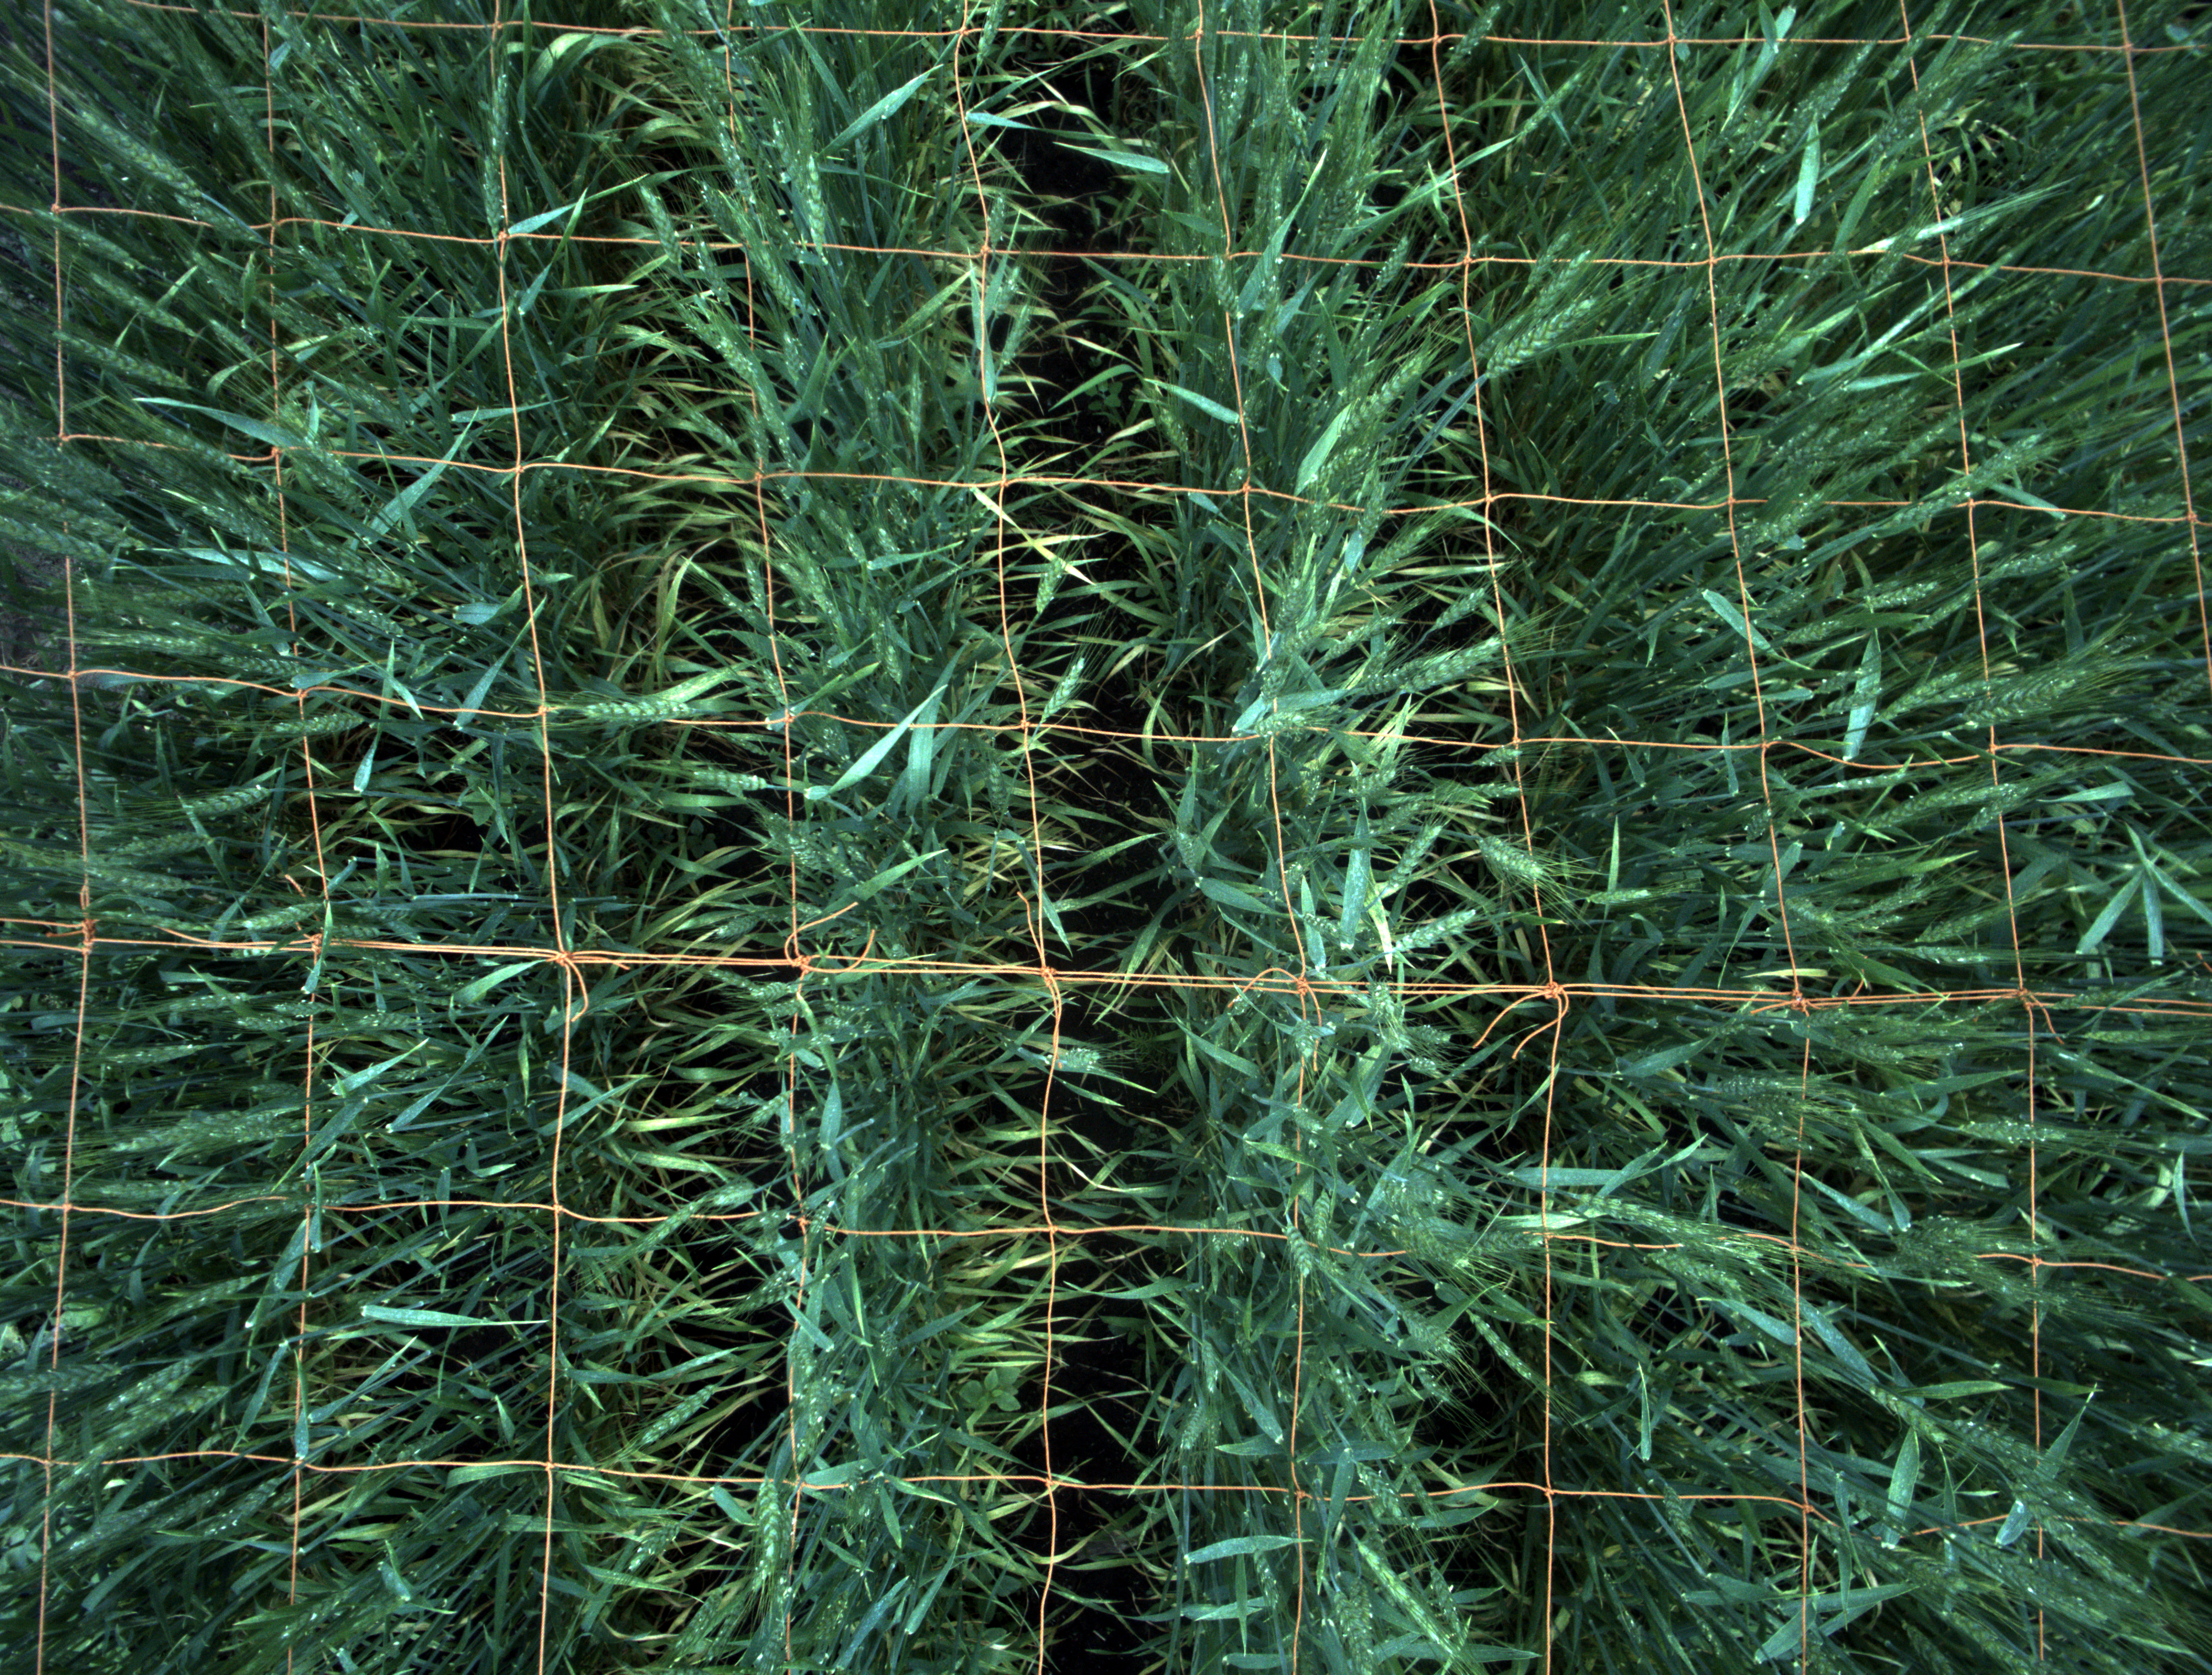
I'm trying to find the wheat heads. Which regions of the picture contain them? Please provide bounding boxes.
[1745,293,1788,338]
[1534,249,1591,321]
[1928,434,2040,498]
[709,1591,744,1650]
[1399,1310,1456,1360]
[716,124,752,200]
[1199,1341,1219,1392]
[1243,394,1267,423]
[231,944,276,961]
[690,770,767,792]
[1620,1605,1643,1650]
[1784,619,1845,646]
[761,664,787,706]
[303,435,351,482]
[1200,0,1219,71]
[771,118,796,185]
[1875,157,1896,189]
[1966,667,2082,730]
[761,391,788,434]
[1930,31,2023,90]
[1664,1485,1692,1536]
[763,1266,791,1292]
[1570,1191,1711,1242]
[1270,76,1289,119]
[820,724,842,753]
[1354,643,1395,683]
[767,812,796,834]
[1380,25,1394,67]
[151,415,255,478]
[1470,1312,1531,1382]
[1374,235,1408,292]
[298,240,348,295]
[235,1014,307,1033]
[1929,676,2011,702]
[1809,241,1849,280]
[408,995,453,1009]
[172,1272,267,1318]
[1814,667,1868,693]
[806,567,833,610]
[228,1105,304,1130]
[1284,859,1303,890]
[277,1477,320,1505]
[1215,343,1232,386]
[1919,914,1984,942]
[1773,424,1817,462]
[344,319,379,345]
[1306,1360,1337,1386]
[861,1480,874,1511]
[1902,1621,1950,1674]
[2083,1029,2171,1046]
[1903,875,1924,888]
[99,1043,198,1072]
[867,338,888,390]
[1802,1009,1854,1027]
[1310,1189,1333,1246]
[1489,297,1596,376]
[1433,588,1483,629]
[744,1093,790,1125]
[272,1001,329,1018]
[316,1257,359,1282]
[107,1384,229,1439]
[1318,1256,1345,1280]
[344,78,374,114]
[202,8,249,58]
[1749,1113,1813,1153]
[1856,392,1895,422]
[1326,975,1370,1007]
[1364,1516,1388,1563]
[1391,1229,1441,1258]
[1166,2,1190,85]
[193,252,241,312]
[1778,15,1824,64]
[1806,1641,1837,1673]
[782,333,803,386]
[1968,786,2032,833]
[1304,762,1321,807]
[138,448,216,502]
[824,852,856,879]
[690,411,742,455]
[684,69,724,112]
[1371,1394,1403,1452]
[1867,1386,1944,1444]
[1821,40,1873,116]
[752,1483,779,1581]
[227,1182,305,1205]
[823,1015,849,1030]
[986,761,1006,818]
[67,0,127,38]
[745,569,770,613]
[1314,445,1361,492]
[236,1470,285,1522]
[1953,1118,2068,1145]
[1952,1418,2043,1463]
[310,537,419,599]
[1865,915,1905,930]
[1344,207,1361,229]
[1212,1222,1226,1249]
[2151,667,2210,703]
[1289,1108,1325,1133]
[1969,1538,2090,1621]
[1526,69,1582,125]
[1693,298,1739,343]
[722,29,747,62]
[211,319,270,374]
[1405,1182,1451,1207]
[927,505,938,522]
[301,463,367,513]
[2009,1484,2142,1597]
[802,1034,835,1045]
[1402,1463,1436,1511]
[1879,1544,1965,1588]
[714,912,757,938]
[702,185,739,239]
[108,632,216,658]
[1296,1027,1317,1058]
[1205,1424,1219,1447]
[753,981,792,1002]
[93,1178,178,1201]
[1231,986,1255,1015]
[1475,780,1519,800]
[1365,653,1436,696]
[471,1079,506,1090]
[190,783,271,816]
[988,193,1008,243]
[1816,455,1895,500]
[749,411,768,466]
[393,1066,433,1083]
[709,967,753,987]
[1873,440,1891,448]
[843,530,869,563]
[1947,1007,1989,1026]
[395,1427,444,1465]
[0,485,117,544]
[1911,593,1971,635]
[1472,324,1508,364]
[1358,1540,1427,1623]
[93,867,194,900]
[339,1598,400,1641]
[1281,620,1328,650]
[1055,1047,1102,1067]
[252,1082,304,1103]
[484,155,506,234]
[75,102,200,196]
[1824,424,1887,459]
[1255,170,1268,225]
[260,1,311,60]
[0,516,108,567]
[1316,187,1353,236]
[1617,387,1636,435]
[1877,400,1915,425]
[879,531,901,554]
[1872,1013,1952,1037]
[1383,151,1430,187]
[764,1025,793,1045]
[627,1521,681,1572]
[774,226,803,261]
[721,591,756,622]
[1866,223,1919,291]
[1332,1364,1358,1405]
[751,1228,779,1250]
[1746,493,1821,546]
[580,699,696,726]
[1641,1250,1741,1291]
[865,386,880,435]
[1476,748,1526,771]
[342,602,404,636]
[842,590,857,623]
[285,181,321,228]
[1344,357,1422,437]
[193,57,272,163]
[13,458,129,524]
[1882,495,1950,537]
[1383,1179,1426,1228]
[1697,1614,1724,1656]
[828,1005,859,1015]
[721,732,763,755]
[1867,786,1987,831]
[1257,660,1283,698]
[1585,886,1650,909]
[360,1646,387,1670]
[795,1427,818,1461]
[422,191,451,232]
[1176,1402,1207,1449]
[1277,578,1308,632]
[1995,542,2075,577]
[745,1286,800,1309]
[1228,1223,1249,1248]
[1300,912,1338,936]
[1715,1073,1786,1101]
[59,1308,100,1331]
[1415,1361,1443,1394]
[808,1380,831,1424]
[907,371,927,435]
[880,1330,899,1358]
[264,65,301,110]
[1371,527,1431,571]
[359,1013,413,1033]
[281,300,337,336]
[1224,466,1243,489]
[1372,981,1393,1019]
[1700,1021,1752,1041]
[1842,771,1908,790]
[1239,0,1266,58]
[179,195,267,246]
[1717,1340,1760,1386]
[1898,412,1960,455]
[1731,346,1770,379]
[1901,1042,1964,1060]
[104,1357,199,1418]
[1913,302,1989,341]
[1474,1230,1548,1257]
[1744,810,1773,840]
[1719,248,1745,291]
[380,217,415,256]
[1257,711,1304,737]
[361,955,423,991]
[792,1343,816,1374]
[1269,172,1283,224]
[111,4,180,73]
[1882,2,1952,82]
[1351,1573,1371,1675]
[1404,637,1501,689]
[2137,1423,2211,1453]
[1386,824,1444,890]
[1287,1227,1312,1279]
[1827,684,1882,714]
[698,239,727,305]
[335,1398,374,1417]
[238,901,323,932]
[1910,1215,1974,1250]
[641,1199,700,1250]
[889,940,910,959]
[713,1093,744,1108]
[1831,1034,1903,1067]
[231,1197,314,1233]
[778,561,809,595]
[259,299,304,336]
[1875,889,1929,908]
[1759,587,1809,622]
[752,247,796,314]
[1245,321,1267,372]
[887,501,909,532]
[1430,1564,1461,1639]
[1910,945,1988,965]
[278,1588,348,1646]
[899,836,917,856]
[810,1204,831,1232]
[1406,1022,1454,1044]
[21,445,122,494]
[1389,909,1476,954]
[671,1586,719,1650]
[640,185,683,262]
[1773,426,1837,480]
[105,911,211,934]
[1477,833,1541,879]
[1445,4,1500,65]
[351,384,406,430]
[49,328,191,394]
[803,154,830,257]
[144,1485,224,1532]
[1209,255,1238,319]
[236,1121,303,1147]
[638,1382,717,1444]
[1866,579,1937,610]
[328,924,384,939]
[70,1495,177,1552]
[221,654,303,679]
[1228,54,1248,125]
[1808,1521,1887,1567]
[1336,128,1356,162]
[269,712,366,741]
[791,642,814,658]
[715,336,757,386]
[783,834,821,871]
[1034,556,1063,614]
[1382,113,1404,142]
[796,550,815,572]
[1405,1054,1438,1075]
[658,22,724,73]
[31,206,134,264]
[1254,1545,1280,1611]
[139,583,246,609]
[199,501,273,547]
[90,272,195,335]
[218,5,259,57]
[164,993,246,1014]
[1039,658,1088,723]
[345,905,413,923]
[1780,77,1832,148]
[1354,766,1396,799]
[1336,1588,1354,1664]
[1372,801,1418,836]
[1938,212,1998,263]
[1784,897,1834,926]
[1886,1233,1956,1276]
[322,95,378,155]
[1848,1494,1910,1536]
[676,303,713,344]
[763,1000,800,1017]
[976,0,1007,62]
[342,257,371,289]
[2026,1557,2098,1601]
[1997,1459,2090,1521]
[882,645,902,687]
[739,1204,788,1229]
[1356,484,1384,539]
[117,831,215,860]
[1746,1094,1813,1119]
[1957,1251,2006,1293]
[1315,0,1340,53]
[796,901,824,917]
[1175,829,1198,870]
[1309,334,1326,364]
[754,1614,787,1663]
[1309,496,1328,536]
[0,1365,118,1397]
[1261,274,1277,320]
[2056,990,2127,1011]
[1005,263,1020,292]
[1359,310,1381,340]
[1730,108,1770,174]
[1953,1613,2035,1674]
[1867,80,1934,159]
[848,847,867,863]
[819,508,842,535]
[109,1115,233,1149]
[1525,231,1570,287]
[1354,1461,1405,1523]
[1697,301,1755,376]
[1159,403,1191,452]
[816,1597,847,1631]
[486,72,512,155]
[707,1181,755,1208]
[1873,671,1955,726]
[1001,302,1033,365]
[852,83,869,114]
[48,1440,115,1506]
[1356,27,1384,67]
[1852,1089,1908,1115]
[1331,616,1398,657]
